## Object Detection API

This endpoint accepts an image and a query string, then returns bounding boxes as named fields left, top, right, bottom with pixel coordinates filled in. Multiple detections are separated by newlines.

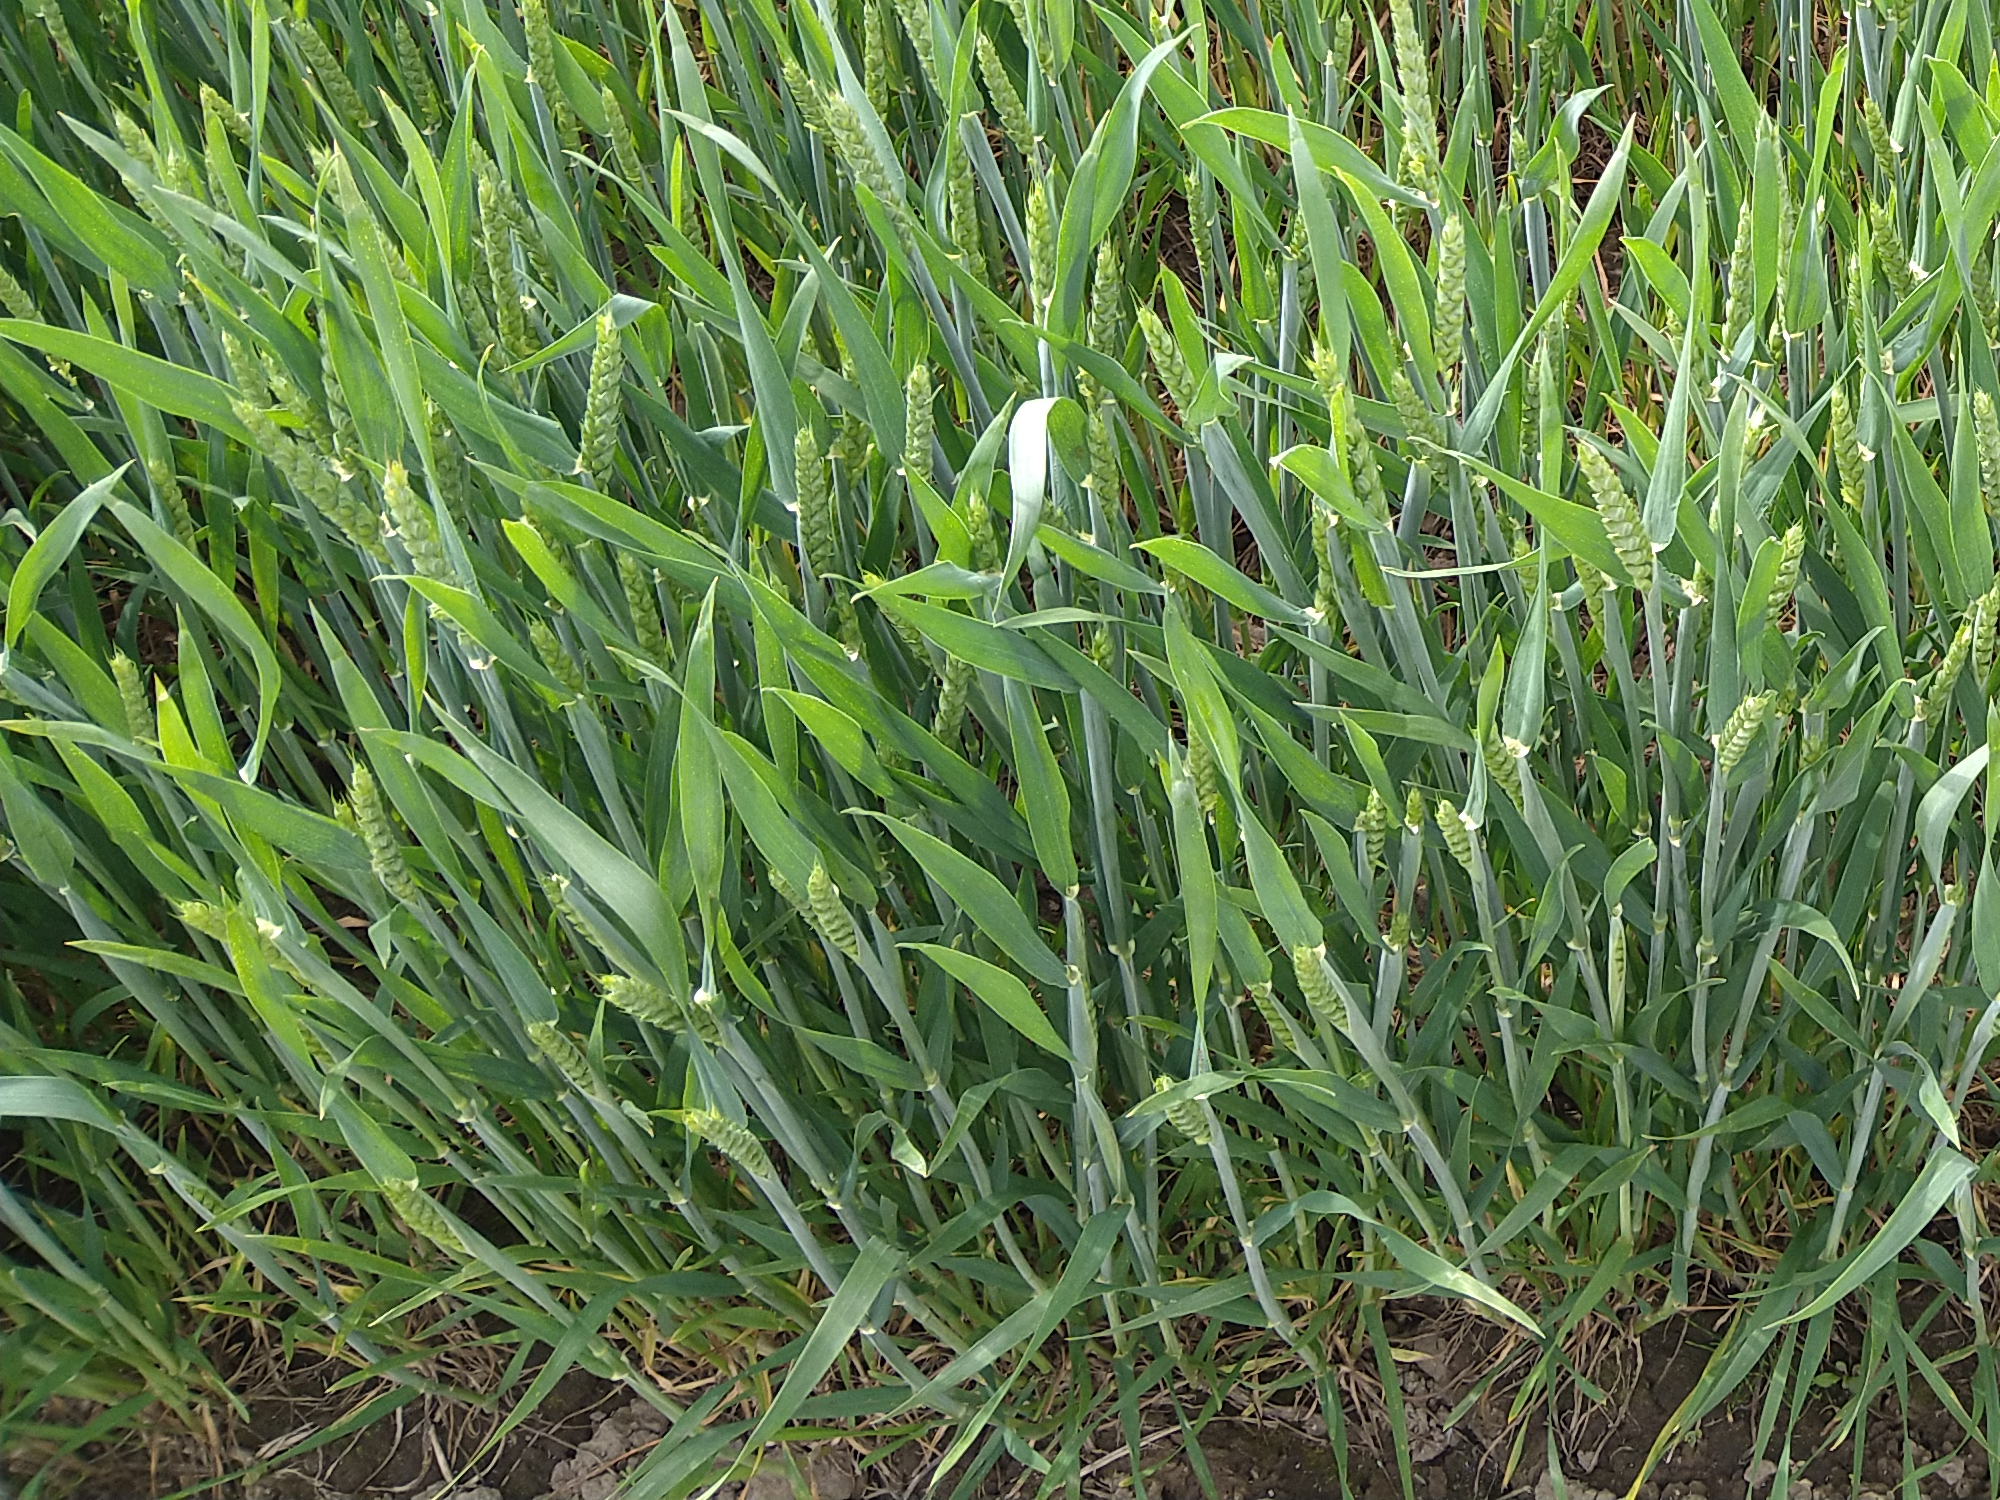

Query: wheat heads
left=1828, top=391, right=1862, bottom=510
left=1667, top=302, right=1713, bottom=401
left=572, top=313, right=622, bottom=496
left=186, top=1187, right=240, bottom=1228
left=21, top=0, right=76, bottom=56
left=808, top=869, right=861, bottom=967
left=1191, top=171, right=1218, bottom=269
left=1435, top=800, right=1475, bottom=877
left=184, top=898, right=304, bottom=973
left=963, top=492, right=1001, bottom=576
left=832, top=361, right=869, bottom=467
left=682, top=148, right=704, bottom=255
left=781, top=61, right=846, bottom=152
left=379, top=1174, right=458, bottom=1248
left=288, top=21, right=373, bottom=137
left=1719, top=198, right=1752, bottom=370
left=1766, top=527, right=1804, bottom=621
left=1314, top=499, right=1349, bottom=637
left=1893, top=0, right=1939, bottom=41
left=765, top=867, right=822, bottom=931
left=865, top=577, right=938, bottom=672
left=1245, top=980, right=1292, bottom=1050
left=1536, top=0, right=1565, bottom=97
left=471, top=142, right=519, bottom=394
left=1523, top=317, right=1564, bottom=479
left=1292, top=203, right=1317, bottom=310
left=1972, top=595, right=1996, bottom=686
left=313, top=308, right=381, bottom=509
left=1718, top=699, right=1764, bottom=774
left=218, top=325, right=272, bottom=412
left=0, top=269, right=68, bottom=370
left=325, top=792, right=354, bottom=829
left=259, top=347, right=333, bottom=459
left=824, top=572, right=870, bottom=678
left=1970, top=391, right=2000, bottom=520
left=1407, top=786, right=1431, bottom=825
left=905, top=361, right=934, bottom=484
left=1923, top=612, right=1972, bottom=744
left=789, top=424, right=836, bottom=572
left=458, top=285, right=525, bottom=411
left=1025, top=164, right=1065, bottom=324
left=1576, top=440, right=1654, bottom=598
left=1080, top=370, right=1119, bottom=533
left=1436, top=211, right=1470, bottom=366
left=1090, top=625, right=1119, bottom=675
left=1390, top=362, right=1451, bottom=493
left=1133, top=306, right=1206, bottom=436
left=146, top=451, right=191, bottom=558
left=598, top=85, right=651, bottom=200
left=1305, top=343, right=1389, bottom=528
left=1284, top=944, right=1345, bottom=1032
left=525, top=1023, right=597, bottom=1103
left=219, top=393, right=397, bottom=569
left=1779, top=164, right=1793, bottom=319
left=107, top=106, right=215, bottom=245
left=1361, top=786, right=1389, bottom=877
left=101, top=648, right=164, bottom=772
left=992, top=0, right=1046, bottom=53
left=538, top=874, right=605, bottom=944
left=381, top=472, right=463, bottom=626
left=1153, top=1073, right=1210, bottom=1150
left=527, top=619, right=597, bottom=706
left=499, top=179, right=558, bottom=300
left=426, top=404, right=467, bottom=536
left=204, top=147, right=241, bottom=261
left=1864, top=99, right=1900, bottom=181
left=1382, top=0, right=1443, bottom=174
left=199, top=82, right=251, bottom=147
left=816, top=95, right=915, bottom=259
left=523, top=507, right=570, bottom=576
left=1483, top=725, right=1523, bottom=820
left=886, top=0, right=934, bottom=102
left=310, top=147, right=410, bottom=286
left=679, top=1109, right=768, bottom=1175
left=863, top=3, right=889, bottom=122
left=1867, top=205, right=1917, bottom=304
left=345, top=763, right=424, bottom=904
left=1614, top=919, right=1627, bottom=984
left=1092, top=237, right=1125, bottom=362
left=974, top=32, right=1033, bottom=154
left=516, top=0, right=573, bottom=139
left=610, top=540, right=666, bottom=671
left=118, top=171, right=187, bottom=274
left=1334, top=8, right=1357, bottom=77
left=1968, top=252, right=1991, bottom=343
left=1186, top=724, right=1212, bottom=813
left=593, top=975, right=719, bottom=1042
left=943, top=113, right=984, bottom=284
left=1032, top=500, right=1105, bottom=548
left=931, top=655, right=968, bottom=749
left=391, top=16, right=443, bottom=130
left=166, top=144, right=204, bottom=207
left=1847, top=247, right=1882, bottom=347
